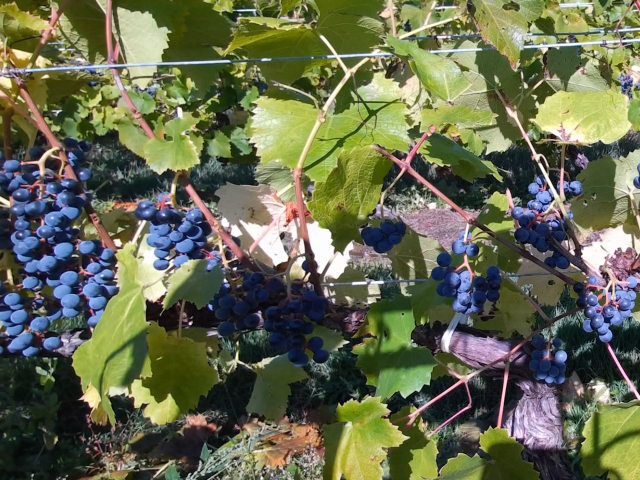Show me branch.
<instances>
[{
	"mask_svg": "<svg viewBox=\"0 0 640 480\" xmlns=\"http://www.w3.org/2000/svg\"><path fill=\"white\" fill-rule=\"evenodd\" d=\"M368 63H369V60H361V61H359L358 63H356L353 66H351L344 73V75L341 77V79L339 80L337 86L334 88V92L326 100V102L320 108L319 112L316 114V116L314 118V121L312 123L311 129H310V132H309V134H308V136H307V138L305 140V143H304L301 151L299 152V155H298L297 160H296V164L294 165L293 170H292V191H293L294 202H295V205H296L297 216H298V218L300 220L299 230L301 231V237H302V244H303L304 252L307 253L306 260H307V267H308V271H309L310 280H311L312 285H313V287L315 289V292L318 294V296H321L323 294V289L319 285V280L317 278L316 269L314 268L313 253H312V250H311V247H310L309 234H308V228H307V218H306L305 213H304L303 203H302V199H301V195H300V189H299V173H300L301 168L303 167L304 159H305L309 149L311 148L312 142L314 141V138L316 137V134H317L318 128L320 126L321 120L323 119V117L326 114L327 110L332 106L334 101L341 94V91L345 87V84L354 75H357L359 72H361Z\"/></svg>",
	"mask_w": 640,
	"mask_h": 480,
	"instance_id": "obj_1",
	"label": "branch"
},
{
	"mask_svg": "<svg viewBox=\"0 0 640 480\" xmlns=\"http://www.w3.org/2000/svg\"><path fill=\"white\" fill-rule=\"evenodd\" d=\"M373 149L377 153L385 156L395 166H399L402 169H404L406 172H408V174L412 177V179L416 183H418L422 188H424L427 192H430L432 195H434L437 198L445 201L458 214H460L462 217H464L468 221H470V222L474 223L475 225L479 226L480 228H482L495 241H498L500 244H502L506 248H508L511 251L515 252L517 255L521 256L525 260H528L531 263L535 264L536 266H539L543 270L550 271L555 278H558V279H560V280H562L564 282H567L568 284H570L572 286H576L578 284V281L576 279L572 278L570 275H565L564 273L558 271L557 269H555L554 267H552L549 264L545 263L544 261H542L538 257H535L530 253H527L526 251L521 249L519 246L513 244L509 240H507L504 237L500 236L495 230H493L484 221H482L481 219L477 218L476 216L470 214L463 207L459 206L450 196H448L447 194L441 192L439 189L434 188L432 185H429L425 180H423L415 172V170L408 163H406L405 161H403L401 159H398L388 149H385L384 147H382V146H380L378 144H375L373 146Z\"/></svg>",
	"mask_w": 640,
	"mask_h": 480,
	"instance_id": "obj_2",
	"label": "branch"
},
{
	"mask_svg": "<svg viewBox=\"0 0 640 480\" xmlns=\"http://www.w3.org/2000/svg\"><path fill=\"white\" fill-rule=\"evenodd\" d=\"M175 174L177 175V177L181 181L183 187L188 191V193L190 194L192 199L195 201L197 206L200 208L202 213L206 216V219L210 222V224L212 225L214 230L217 232V234L225 242H227V244L230 246L231 250L244 261V263L248 266L249 270L251 272H254L256 270V266H255L254 262L249 258V256L242 249H240L237 246V244L233 240V238L231 236H229L222 229V227L220 226L218 221L215 219V217L213 216V214L211 213L209 208L206 206V204L201 199V197L197 194L195 188L192 185H190V182H189L188 178L186 177V175L183 173V171L181 169H177L175 171Z\"/></svg>",
	"mask_w": 640,
	"mask_h": 480,
	"instance_id": "obj_3",
	"label": "branch"
},
{
	"mask_svg": "<svg viewBox=\"0 0 640 480\" xmlns=\"http://www.w3.org/2000/svg\"><path fill=\"white\" fill-rule=\"evenodd\" d=\"M15 83H16V86H17L19 92L24 96V99H25V102H26V105H27L29 111L37 119V122H38L40 128L42 129V131L46 135L47 142H48L49 146L56 150L57 159H58V161H59V163L61 165V168L66 173V176L70 180H73L75 178V175H74L73 171L71 170V168L68 166V163H67L66 158L64 156L63 147H62L60 141L53 135V133L50 130L49 126L47 125L43 115L35 107L30 92L24 86L23 77L22 76L15 77Z\"/></svg>",
	"mask_w": 640,
	"mask_h": 480,
	"instance_id": "obj_4",
	"label": "branch"
},
{
	"mask_svg": "<svg viewBox=\"0 0 640 480\" xmlns=\"http://www.w3.org/2000/svg\"><path fill=\"white\" fill-rule=\"evenodd\" d=\"M546 241L548 243H551L554 249L558 248L560 253L563 256L567 257L575 266H577L578 268H582L586 276H589L590 274L595 276L596 278H598L597 283L599 285H602L603 287H607L609 285V282L607 281L606 276L601 271H598L597 269L590 267L587 264L580 261L571 251L566 249L564 244L560 240H558L555 236L553 235L548 236L546 238Z\"/></svg>",
	"mask_w": 640,
	"mask_h": 480,
	"instance_id": "obj_5",
	"label": "branch"
},
{
	"mask_svg": "<svg viewBox=\"0 0 640 480\" xmlns=\"http://www.w3.org/2000/svg\"><path fill=\"white\" fill-rule=\"evenodd\" d=\"M114 85L116 86V89L118 90V92L120 93V95L123 97L125 103L127 104L128 108L130 109L131 113L133 114V116L136 118V120L138 121L139 125L145 130V132L147 133V135L151 138L154 139L156 137V133L152 130V128L149 126V124L145 121L143 115L138 111L135 103L133 102L130 94L126 91V89L123 87V84L121 83V79L120 76L118 75L117 71H109Z\"/></svg>",
	"mask_w": 640,
	"mask_h": 480,
	"instance_id": "obj_6",
	"label": "branch"
},
{
	"mask_svg": "<svg viewBox=\"0 0 640 480\" xmlns=\"http://www.w3.org/2000/svg\"><path fill=\"white\" fill-rule=\"evenodd\" d=\"M461 19H462V16L460 14H456L454 16L447 17V18H444V19H436V20H434L432 22H429V23H427V24H425L423 26H419L417 28L411 29L410 31H406L404 33H400L398 35V38L400 40H406L408 38H412V37H414L416 35H419L421 33L428 32V31H430V30H432V29H434V28H436L438 26H446V25H449V24L456 23V22L460 21Z\"/></svg>",
	"mask_w": 640,
	"mask_h": 480,
	"instance_id": "obj_7",
	"label": "branch"
},
{
	"mask_svg": "<svg viewBox=\"0 0 640 480\" xmlns=\"http://www.w3.org/2000/svg\"><path fill=\"white\" fill-rule=\"evenodd\" d=\"M114 16L113 0H106V25H105V50L106 59L109 64H114L113 48H112V27Z\"/></svg>",
	"mask_w": 640,
	"mask_h": 480,
	"instance_id": "obj_8",
	"label": "branch"
},
{
	"mask_svg": "<svg viewBox=\"0 0 640 480\" xmlns=\"http://www.w3.org/2000/svg\"><path fill=\"white\" fill-rule=\"evenodd\" d=\"M85 211H86L87 218L90 220L92 225L96 228V230L100 233V236L102 237V240L104 241L106 246L108 248H111L112 250H115L117 248V245L112 242V240L109 237L106 229L99 222V220H98V218L96 216V212H95L94 207L91 204H87L85 206Z\"/></svg>",
	"mask_w": 640,
	"mask_h": 480,
	"instance_id": "obj_9",
	"label": "branch"
}]
</instances>
